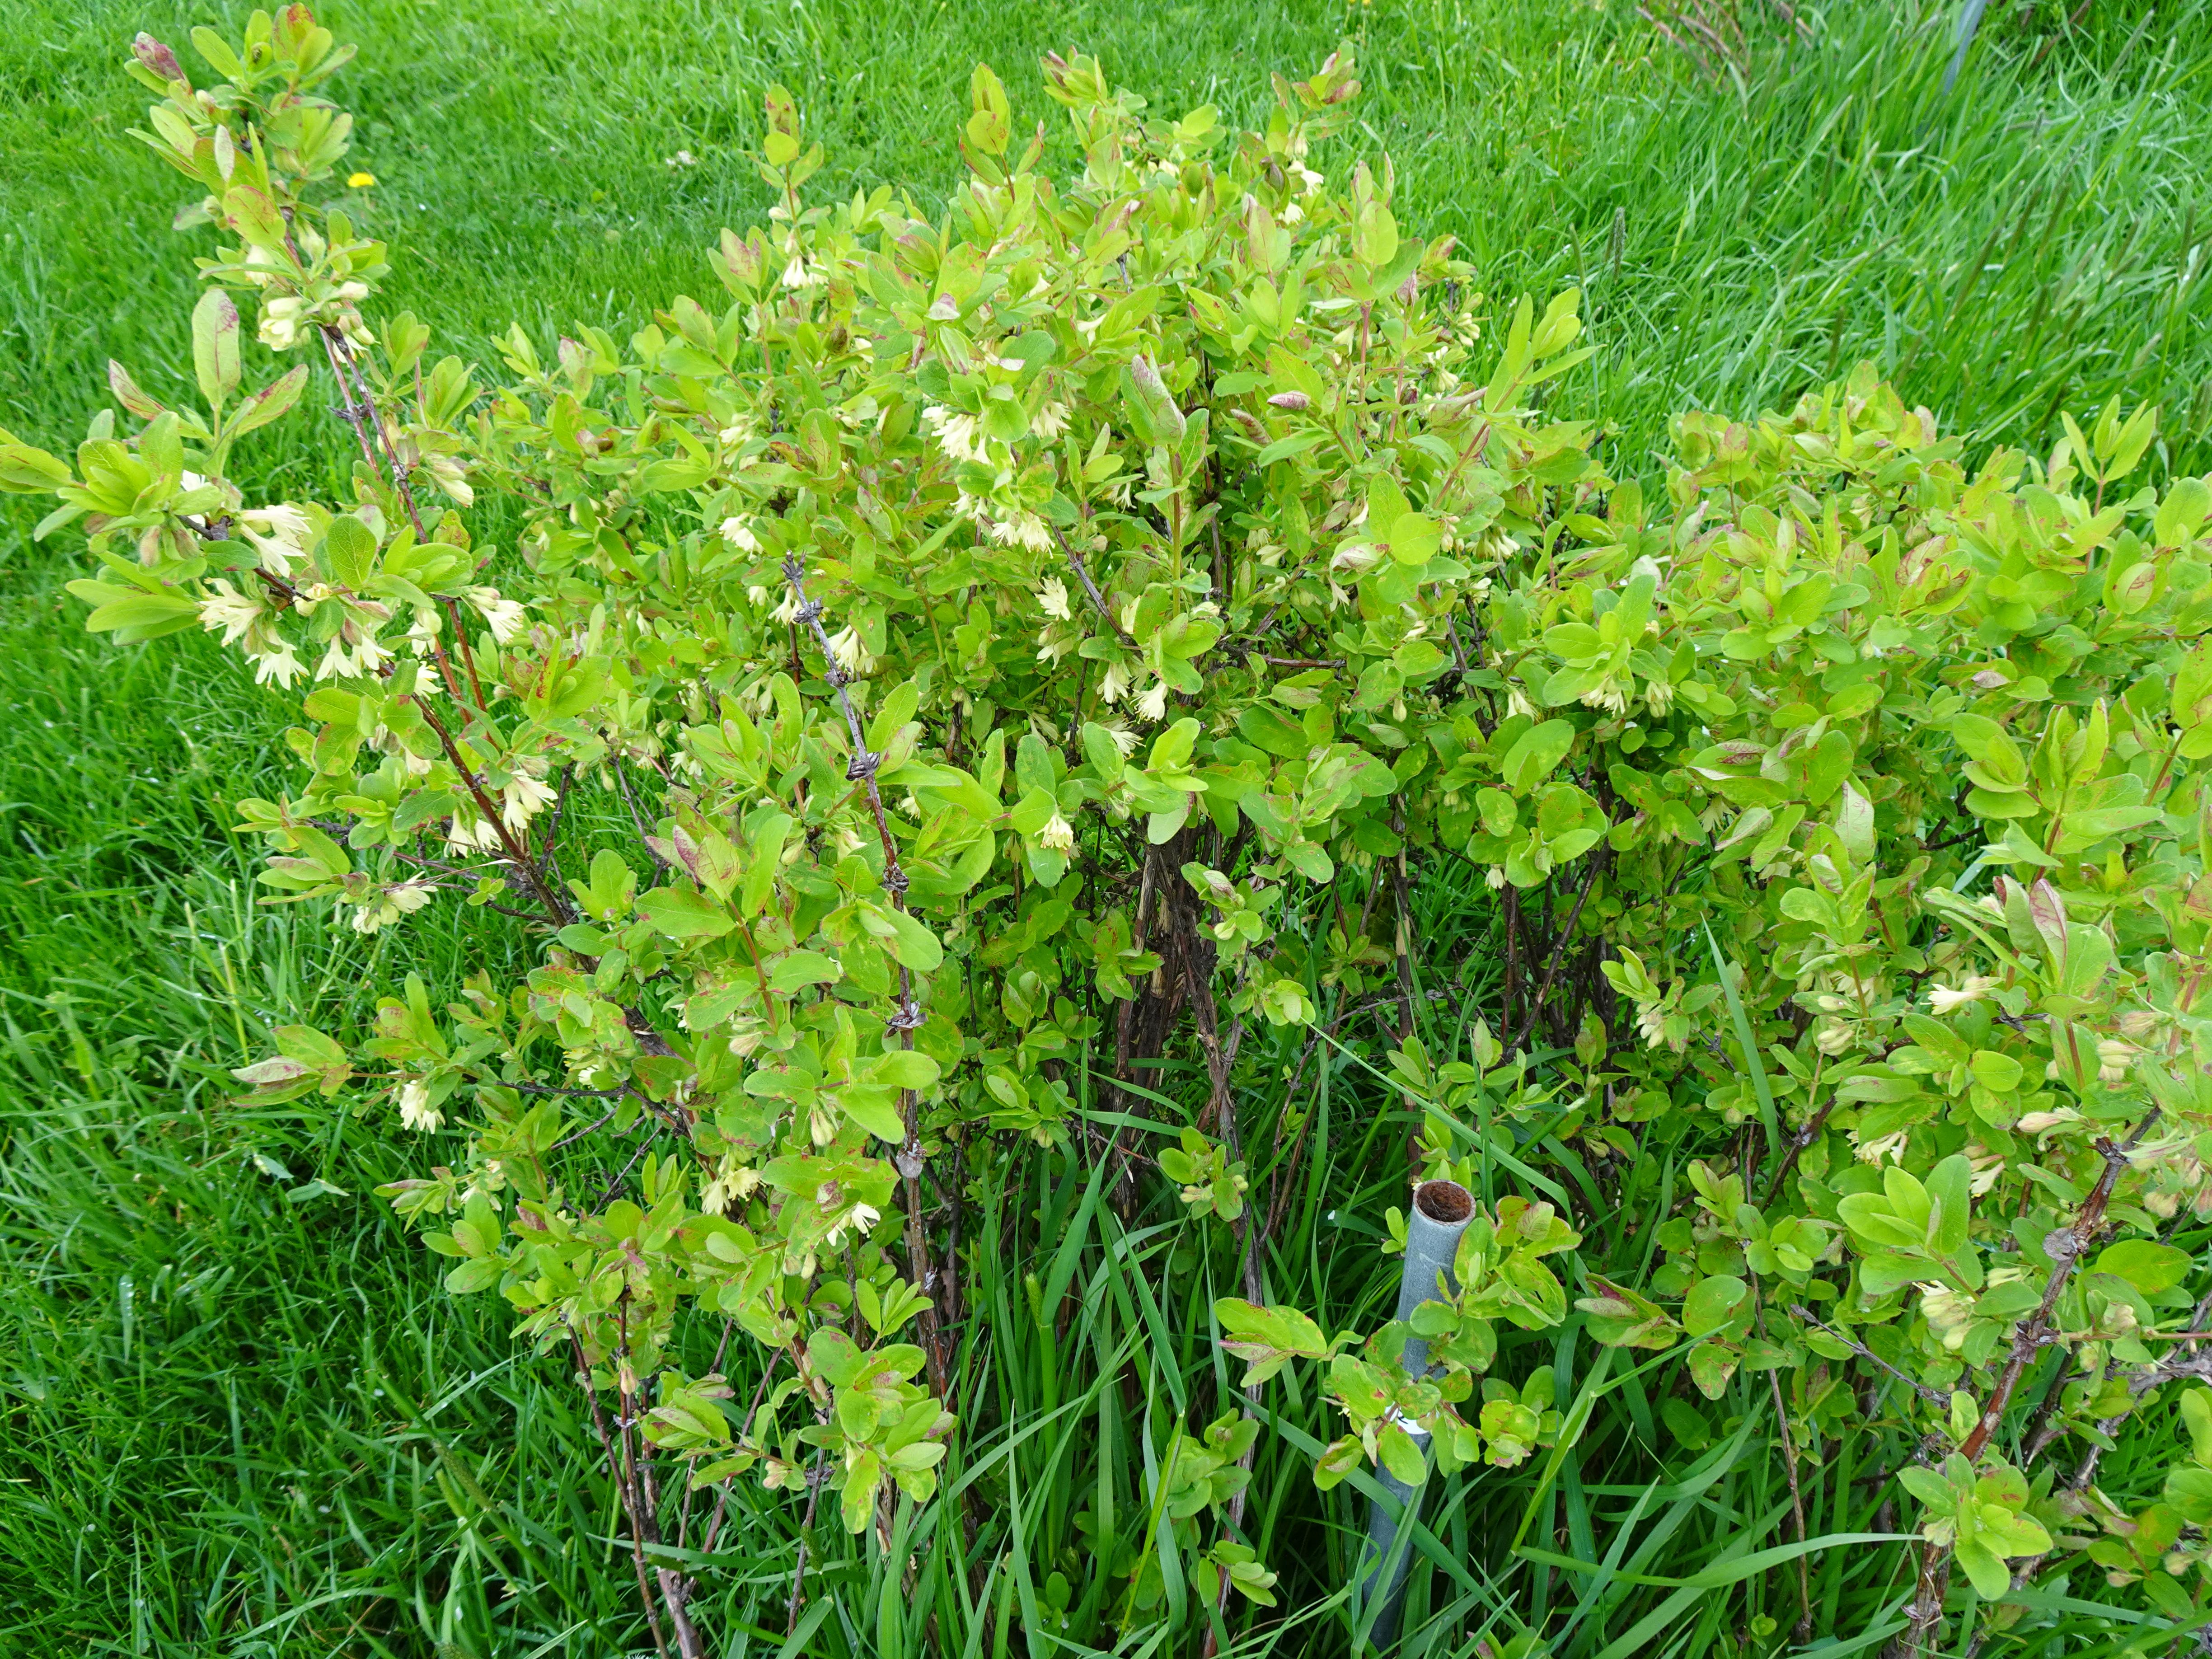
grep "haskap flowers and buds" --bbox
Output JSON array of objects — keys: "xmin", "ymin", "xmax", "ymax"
[
  {"xmin": 1447, "ymin": 369, "xmax": 1459, "ymax": 386},
  {"xmin": 940, "ymin": 416, "xmax": 972, "ymax": 457},
  {"xmin": 402, "ymin": 746, "xmax": 432, "ymax": 777},
  {"xmin": 1237, "ymin": 1181, "xmax": 1249, "ymax": 1192},
  {"xmin": 1287, "ymin": 161, "xmax": 1325, "ymax": 201},
  {"xmin": 187, "ymin": 514, "xmax": 207, "ymax": 538},
  {"xmin": 609, "ymin": 491, "xmax": 625, "ymax": 507},
  {"xmin": 1443, "ymin": 372, "xmax": 1454, "ymax": 390},
  {"xmin": 669, "ymin": 749, "xmax": 690, "ymax": 773},
  {"xmin": 1099, "ymin": 725, "xmax": 1145, "ymax": 753},
  {"xmin": 1487, "ymin": 865, "xmax": 1505, "ymax": 890},
  {"xmin": 1036, "ymin": 578, "xmax": 1071, "ymax": 620},
  {"xmin": 618, "ymin": 480, "xmax": 631, "ymax": 493},
  {"xmin": 413, "ymin": 661, "xmax": 441, "ymax": 698},
  {"xmin": 1471, "ymin": 325, "xmax": 1482, "ymax": 334},
  {"xmin": 1503, "ymin": 533, "xmax": 1520, "ymax": 556},
  {"xmin": 950, "ymin": 494, "xmax": 975, "ymax": 516},
  {"xmin": 973, "ymin": 430, "xmax": 992, "ymax": 465},
  {"xmin": 1851, "ymin": 976, "xmax": 1876, "ymax": 1006},
  {"xmin": 1135, "ymin": 677, "xmax": 1171, "ymax": 725},
  {"xmin": 140, "ymin": 525, "xmax": 164, "ymax": 569},
  {"xmin": 1344, "ymin": 701, "xmax": 1351, "ymax": 714},
  {"xmin": 1818, "ymin": 1029, "xmax": 1837, "ymax": 1041},
  {"xmin": 1484, "ymin": 532, "xmax": 1496, "ymax": 559},
  {"xmin": 1446, "ymin": 514, "xmax": 1462, "ymax": 524},
  {"xmin": 991, "ymin": 436, "xmax": 1016, "ymax": 466},
  {"xmin": 247, "ymin": 505, "xmax": 312, "ymax": 546},
  {"xmin": 656, "ymin": 722, "xmax": 668, "ymax": 732},
  {"xmin": 2132, "ymin": 1156, "xmax": 2156, "ymax": 1172},
  {"xmin": 1438, "ymin": 376, "xmax": 1446, "ymax": 392},
  {"xmin": 1826, "ymin": 1031, "xmax": 1855, "ymax": 1051},
  {"xmin": 628, "ymin": 1366, "xmax": 635, "ymax": 1393},
  {"xmin": 1393, "ymin": 698, "xmax": 1406, "ymax": 722},
  {"xmin": 1108, "ymin": 795, "xmax": 1130, "ymax": 819},
  {"xmin": 820, "ymin": 621, "xmax": 857, "ymax": 651},
  {"xmin": 1035, "ymin": 636, "xmax": 1063, "ymax": 668},
  {"xmin": 990, "ymin": 508, "xmax": 1020, "ymax": 546},
  {"xmin": 1828, "ymin": 968, "xmax": 1857, "ymax": 995},
  {"xmin": 496, "ymin": 600, "xmax": 525, "ymax": 623},
  {"xmin": 836, "ymin": 835, "xmax": 852, "ymax": 867},
  {"xmin": 266, "ymin": 297, "xmax": 303, "ymax": 316},
  {"xmin": 354, "ymin": 327, "xmax": 381, "ymax": 346},
  {"xmin": 791, "ymin": 600, "xmax": 806, "ymax": 630},
  {"xmin": 724, "ymin": 1168, "xmax": 761, "ymax": 1203},
  {"xmin": 636, "ymin": 609, "xmax": 653, "ymax": 636},
  {"xmin": 963, "ymin": 697, "xmax": 973, "ymax": 717},
  {"xmin": 1467, "ymin": 541, "xmax": 1478, "ymax": 556},
  {"xmin": 1263, "ymin": 546, "xmax": 1293, "ymax": 568},
  {"xmin": 790, "ymin": 254, "xmax": 809, "ymax": 290},
  {"xmin": 850, "ymin": 1198, "xmax": 880, "ymax": 1235},
  {"xmin": 2157, "ymin": 1194, "xmax": 2178, "ymax": 1219},
  {"xmin": 1077, "ymin": 312, "xmax": 1108, "ymax": 347},
  {"xmin": 336, "ymin": 314, "xmax": 350, "ymax": 333},
  {"xmin": 473, "ymin": 817, "xmax": 503, "ymax": 853},
  {"xmin": 1334, "ymin": 321, "xmax": 1358, "ymax": 354},
  {"xmin": 688, "ymin": 758, "xmax": 702, "ymax": 777},
  {"xmin": 1818, "ymin": 1043, "xmax": 1835, "ymax": 1053},
  {"xmin": 1471, "ymin": 578, "xmax": 1491, "ymax": 603},
  {"xmin": 1329, "ymin": 350, "xmax": 1341, "ymax": 365},
  {"xmin": 375, "ymin": 420, "xmax": 402, "ymax": 454},
  {"xmin": 1110, "ymin": 710, "xmax": 1137, "ymax": 732},
  {"xmin": 671, "ymin": 1003, "xmax": 689, "ymax": 1030},
  {"xmin": 1031, "ymin": 513, "xmax": 1058, "ymax": 553},
  {"xmin": 258, "ymin": 310, "xmax": 302, "ymax": 351},
  {"xmin": 700, "ymin": 658, "xmax": 721, "ymax": 673},
  {"xmin": 646, "ymin": 731, "xmax": 664, "ymax": 757},
  {"xmin": 1158, "ymin": 159, "xmax": 1178, "ymax": 179},
  {"xmin": 1294, "ymin": 131, "xmax": 1309, "ymax": 159},
  {"xmin": 1097, "ymin": 665, "xmax": 1128, "ymax": 703},
  {"xmin": 1964, "ymin": 1145, "xmax": 1988, "ymax": 1158},
  {"xmin": 1971, "ymin": 1161, "xmax": 2007, "ymax": 1196},
  {"xmin": 1029, "ymin": 716, "xmax": 1047, "ymax": 750},
  {"xmin": 369, "ymin": 718, "xmax": 389, "ymax": 753},
  {"xmin": 1457, "ymin": 313, "xmax": 1473, "ymax": 326},
  {"xmin": 1033, "ymin": 711, "xmax": 1060, "ymax": 740},
  {"xmin": 768, "ymin": 587, "xmax": 795, "ymax": 626},
  {"xmin": 1457, "ymin": 331, "xmax": 1475, "ymax": 348},
  {"xmin": 434, "ymin": 474, "xmax": 475, "ymax": 509},
  {"xmin": 782, "ymin": 261, "xmax": 794, "ymax": 287},
  {"xmin": 1256, "ymin": 543, "xmax": 1289, "ymax": 562},
  {"xmin": 1233, "ymin": 1174, "xmax": 1245, "ymax": 1182},
  {"xmin": 406, "ymin": 607, "xmax": 443, "ymax": 654},
  {"xmin": 1209, "ymin": 606, "xmax": 1221, "ymax": 615},
  {"xmin": 1181, "ymin": 1192, "xmax": 1202, "ymax": 1202},
  {"xmin": 354, "ymin": 905, "xmax": 381, "ymax": 938},
  {"xmin": 785, "ymin": 230, "xmax": 801, "ymax": 252},
  {"xmin": 535, "ymin": 529, "xmax": 550, "ymax": 550},
  {"xmin": 1645, "ymin": 678, "xmax": 1662, "ymax": 705},
  {"xmin": 1246, "ymin": 529, "xmax": 1259, "ymax": 552},
  {"xmin": 1121, "ymin": 595, "xmax": 1141, "ymax": 634},
  {"xmin": 1282, "ymin": 202, "xmax": 1305, "ymax": 226},
  {"xmin": 810, "ymin": 1111, "xmax": 825, "ymax": 1148},
  {"xmin": 2101, "ymin": 1054, "xmax": 2130, "ymax": 1069},
  {"xmin": 1492, "ymin": 534, "xmax": 1510, "ymax": 561},
  {"xmin": 1449, "ymin": 525, "xmax": 1465, "ymax": 555},
  {"xmin": 898, "ymin": 796, "xmax": 923, "ymax": 821},
  {"xmin": 2182, "ymin": 1154, "xmax": 2203, "ymax": 1185},
  {"xmin": 587, "ymin": 494, "xmax": 615, "ymax": 528},
  {"xmin": 1014, "ymin": 517, "xmax": 1038, "ymax": 552},
  {"xmin": 1340, "ymin": 702, "xmax": 1347, "ymax": 714},
  {"xmin": 1122, "ymin": 789, "xmax": 1140, "ymax": 804},
  {"xmin": 181, "ymin": 469, "xmax": 207, "ymax": 493},
  {"xmin": 698, "ymin": 1175, "xmax": 730, "ymax": 1216},
  {"xmin": 399, "ymin": 1086, "xmax": 423, "ymax": 1129},
  {"xmin": 859, "ymin": 644, "xmax": 876, "ymax": 672},
  {"xmin": 1101, "ymin": 485, "xmax": 1122, "ymax": 502},
  {"xmin": 1031, "ymin": 414, "xmax": 1045, "ymax": 437},
  {"xmin": 471, "ymin": 585, "xmax": 502, "ymax": 600},
  {"xmin": 739, "ymin": 675, "xmax": 764, "ymax": 702},
  {"xmin": 780, "ymin": 841, "xmax": 805, "ymax": 865},
  {"xmin": 239, "ymin": 524, "xmax": 306, "ymax": 578},
  {"xmin": 619, "ymin": 1368, "xmax": 632, "ymax": 1395},
  {"xmin": 1891, "ymin": 1133, "xmax": 1908, "ymax": 1167},
  {"xmin": 1848, "ymin": 1130, "xmax": 1903, "ymax": 1171},
  {"xmin": 827, "ymin": 1211, "xmax": 850, "ymax": 1246},
  {"xmin": 394, "ymin": 1080, "xmax": 422, "ymax": 1106},
  {"xmin": 717, "ymin": 512, "xmax": 743, "ymax": 539},
  {"xmin": 729, "ymin": 1032, "xmax": 763, "ymax": 1059},
  {"xmin": 1034, "ymin": 813, "xmax": 1058, "ymax": 852},
  {"xmin": 317, "ymin": 632, "xmax": 355, "ymax": 685},
  {"xmin": 719, "ymin": 427, "xmax": 742, "ymax": 445},
  {"xmin": 951, "ymin": 422, "xmax": 975, "ymax": 460},
  {"xmin": 422, "ymin": 1088, "xmax": 447, "ymax": 1132},
  {"xmin": 477, "ymin": 607, "xmax": 525, "ymax": 644},
  {"xmin": 602, "ymin": 772, "xmax": 615, "ymax": 791},
  {"xmin": 1118, "ymin": 656, "xmax": 1131, "ymax": 684},
  {"xmin": 2098, "ymin": 1061, "xmax": 2127, "ymax": 1083},
  {"xmin": 1263, "ymin": 572, "xmax": 1290, "ymax": 605},
  {"xmin": 768, "ymin": 206, "xmax": 791, "ymax": 221},
  {"xmin": 2099, "ymin": 1040, "xmax": 2136, "ymax": 1055},
  {"xmin": 1216, "ymin": 923, "xmax": 1240, "ymax": 940},
  {"xmin": 1258, "ymin": 527, "xmax": 1272, "ymax": 546},
  {"xmin": 724, "ymin": 431, "xmax": 760, "ymax": 471},
  {"xmin": 1637, "ymin": 1001, "xmax": 1654, "ymax": 1015},
  {"xmin": 437, "ymin": 461, "xmax": 464, "ymax": 482},
  {"xmin": 843, "ymin": 829, "xmax": 868, "ymax": 854},
  {"xmin": 921, "ymin": 404, "xmax": 950, "ymax": 427},
  {"xmin": 202, "ymin": 605, "xmax": 266, "ymax": 647},
  {"xmin": 1506, "ymin": 693, "xmax": 1518, "ymax": 720},
  {"xmin": 1194, "ymin": 601, "xmax": 1214, "ymax": 616},
  {"xmin": 369, "ymin": 672, "xmax": 387, "ymax": 699},
  {"xmin": 1926, "ymin": 983, "xmax": 1970, "ymax": 1016},
  {"xmin": 1349, "ymin": 506, "xmax": 1369, "ymax": 529},
  {"xmin": 2019, "ymin": 1108, "xmax": 2084, "ymax": 1134},
  {"xmin": 1596, "ymin": 683, "xmax": 1626, "ymax": 713},
  {"xmin": 304, "ymin": 584, "xmax": 332, "ymax": 603},
  {"xmin": 659, "ymin": 726, "xmax": 671, "ymax": 739},
  {"xmin": 439, "ymin": 808, "xmax": 478, "ymax": 857},
  {"xmin": 1818, "ymin": 994, "xmax": 1846, "ymax": 1013},
  {"xmin": 1442, "ymin": 531, "xmax": 1453, "ymax": 553},
  {"xmin": 1464, "ymin": 329, "xmax": 1478, "ymax": 340},
  {"xmin": 1292, "ymin": 588, "xmax": 1322, "ymax": 608},
  {"xmin": 808, "ymin": 252, "xmax": 831, "ymax": 286},
  {"xmin": 2118, "ymin": 1011, "xmax": 2166, "ymax": 1038},
  {"xmin": 1968, "ymin": 1152, "xmax": 2003, "ymax": 1172},
  {"xmin": 634, "ymin": 754, "xmax": 654, "ymax": 770},
  {"xmin": 1043, "ymin": 405, "xmax": 1072, "ymax": 439},
  {"xmin": 1827, "ymin": 1045, "xmax": 1849, "ymax": 1057},
  {"xmin": 392, "ymin": 870, "xmax": 438, "ymax": 918},
  {"xmin": 293, "ymin": 597, "xmax": 318, "ymax": 617},
  {"xmin": 679, "ymin": 677, "xmax": 699, "ymax": 698},
  {"xmin": 2145, "ymin": 1190, "xmax": 2163, "ymax": 1212},
  {"xmin": 1650, "ymin": 700, "xmax": 1667, "ymax": 718},
  {"xmin": 1029, "ymin": 274, "xmax": 1054, "ymax": 304},
  {"xmin": 246, "ymin": 638, "xmax": 308, "ymax": 690},
  {"xmin": 462, "ymin": 1185, "xmax": 502, "ymax": 1211},
  {"xmin": 345, "ymin": 300, "xmax": 363, "ymax": 329},
  {"xmin": 350, "ymin": 632, "xmax": 395, "ymax": 680},
  {"xmin": 1407, "ymin": 619, "xmax": 1428, "ymax": 639},
  {"xmin": 1114, "ymin": 483, "xmax": 1134, "ymax": 511},
  {"xmin": 1964, "ymin": 976, "xmax": 2004, "ymax": 994},
  {"xmin": 1863, "ymin": 639, "xmax": 1874, "ymax": 657},
  {"xmin": 469, "ymin": 593, "xmax": 496, "ymax": 609},
  {"xmin": 1977, "ymin": 894, "xmax": 2006, "ymax": 920},
  {"xmin": 380, "ymin": 902, "xmax": 401, "ymax": 926},
  {"xmin": 1092, "ymin": 535, "xmax": 1107, "ymax": 544},
  {"xmin": 1658, "ymin": 682, "xmax": 1673, "ymax": 703},
  {"xmin": 749, "ymin": 586, "xmax": 770, "ymax": 608},
  {"xmin": 951, "ymin": 686, "xmax": 964, "ymax": 701},
  {"xmin": 196, "ymin": 576, "xmax": 262, "ymax": 608},
  {"xmin": 1640, "ymin": 1019, "xmax": 1668, "ymax": 1047},
  {"xmin": 1184, "ymin": 1185, "xmax": 1203, "ymax": 1194},
  {"xmin": 1327, "ymin": 575, "xmax": 1353, "ymax": 611},
  {"xmin": 1094, "ymin": 542, "xmax": 1108, "ymax": 554},
  {"xmin": 931, "ymin": 414, "xmax": 965, "ymax": 444},
  {"xmin": 1049, "ymin": 397, "xmax": 1073, "ymax": 424},
  {"xmin": 580, "ymin": 543, "xmax": 602, "ymax": 568},
  {"xmin": 757, "ymin": 682, "xmax": 775, "ymax": 714},
  {"xmin": 499, "ymin": 785, "xmax": 531, "ymax": 829},
  {"xmin": 579, "ymin": 1068, "xmax": 598, "ymax": 1087},
  {"xmin": 1634, "ymin": 1005, "xmax": 1663, "ymax": 1026},
  {"xmin": 1512, "ymin": 682, "xmax": 1539, "ymax": 722},
  {"xmin": 1357, "ymin": 328, "xmax": 1375, "ymax": 349},
  {"xmin": 1579, "ymin": 674, "xmax": 1611, "ymax": 707},
  {"xmin": 1055, "ymin": 817, "xmax": 1076, "ymax": 850},
  {"xmin": 840, "ymin": 631, "xmax": 858, "ymax": 672},
  {"xmin": 331, "ymin": 336, "xmax": 367, "ymax": 365},
  {"xmin": 818, "ymin": 1111, "xmax": 835, "ymax": 1144},
  {"xmin": 735, "ymin": 515, "xmax": 761, "ymax": 546},
  {"xmin": 967, "ymin": 496, "xmax": 990, "ymax": 523},
  {"xmin": 245, "ymin": 248, "xmax": 275, "ymax": 285},
  {"xmin": 744, "ymin": 534, "xmax": 764, "ymax": 555}
]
